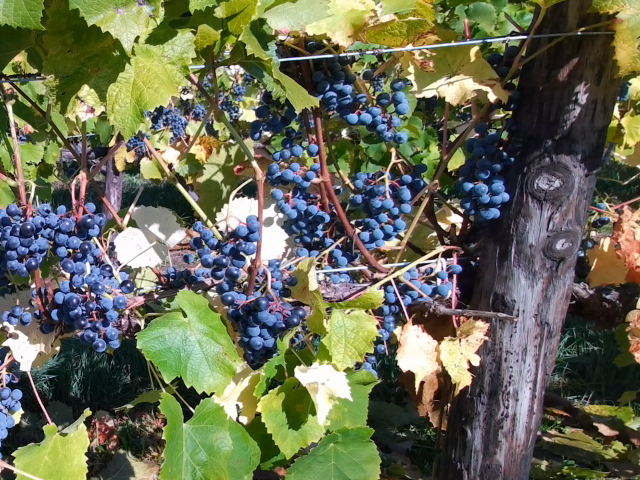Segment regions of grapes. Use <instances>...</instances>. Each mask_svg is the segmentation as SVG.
<instances>
[{"mask_svg":"<svg viewBox=\"0 0 640 480\" xmlns=\"http://www.w3.org/2000/svg\"><path fill=\"white\" fill-rule=\"evenodd\" d=\"M87 212L77 225L76 234L72 236L77 220L71 215L61 216L68 212L66 205H59L53 213L48 202L38 207V214L21 219L24 210L19 205L8 204L6 209H0V269L11 274L18 273L20 277H28L30 272L38 270L42 259L47 254L48 246L55 240L56 255L61 258L60 265L66 273H74L72 281H61L53 295L55 305L50 311L52 321L64 320L68 333L84 330L80 334V343L93 345L94 351L103 353L107 350V343L111 350L121 347L118 339L119 331L113 327L114 321L120 318V311L128 305V298L116 295L114 298L103 297L104 293L111 294L114 290L130 294L135 290V284L130 281L129 272H119L121 283L114 277V270L110 263L95 265L96 256L101 249L91 242L101 234V228L107 224L105 213L94 214L97 205L87 202ZM82 288L86 284L92 287L93 300L84 302L79 293H71L72 286ZM105 313V319L92 321L89 314L96 310Z\"/></svg>","mask_w":640,"mask_h":480,"instance_id":"1","label":"grapes"},{"mask_svg":"<svg viewBox=\"0 0 640 480\" xmlns=\"http://www.w3.org/2000/svg\"><path fill=\"white\" fill-rule=\"evenodd\" d=\"M245 225H236L235 230L229 231V237L235 243L221 242L214 238L203 221H195L193 230L200 233L192 237L189 245L192 250H198L201 265L194 271L196 282H203L204 277H212L215 281L222 280L216 286L221 295V304L229 306L227 319L237 321V332L240 333L239 346L246 350L243 359L249 366L265 364L267 360L279 355L276 335L285 329L296 327L305 318V309L294 307L289 302L280 301L279 306L285 307L286 316L280 311L270 313V303L274 297L266 293L254 292L248 296L241 291H233L235 281L240 278L241 270L246 264V258L240 254L254 255L257 251L254 242L261 239L259 233L260 222L256 215L245 218Z\"/></svg>","mask_w":640,"mask_h":480,"instance_id":"2","label":"grapes"},{"mask_svg":"<svg viewBox=\"0 0 640 480\" xmlns=\"http://www.w3.org/2000/svg\"><path fill=\"white\" fill-rule=\"evenodd\" d=\"M427 171V165L420 163L415 166V172L403 175L400 178V184L402 186L396 188L398 199L401 203L399 207L395 206V201L392 198L380 199L381 195H386V185H367L360 194H355L349 199V204L352 207H360L361 203L364 206L361 207V211L367 214L364 219H356L355 226H363L362 232L359 233L364 244L367 246L370 252H374L376 247H384L386 242H392L397 239V235L401 234L407 227V222L403 220L400 213L411 214V200L413 194L410 189L415 192H421L425 188V182L423 179H419V176ZM382 210H389V215L394 220V225L380 226L381 223H387L389 216L381 212Z\"/></svg>","mask_w":640,"mask_h":480,"instance_id":"3","label":"grapes"},{"mask_svg":"<svg viewBox=\"0 0 640 480\" xmlns=\"http://www.w3.org/2000/svg\"><path fill=\"white\" fill-rule=\"evenodd\" d=\"M321 169V164L312 163L310 170L305 172V177L301 175H294V172L301 171V164L299 162H291L289 169L280 171V165L278 163H269L268 171L266 173V179L270 180V185L278 187L281 185H287L290 183L297 184L293 189L292 201L285 202L283 199L284 191L281 188H273L271 190V196L277 201V208L281 210L283 214H287L290 219V223L285 227V233L288 236H292L295 233H303L302 236H295L294 241L296 243H310L314 238L323 240V246L325 249L333 246L335 240L330 237L324 238V227L331 220V215L328 212L321 211L316 205H309L307 202L315 197L314 193L307 192V189L311 187V181L317 177V172Z\"/></svg>","mask_w":640,"mask_h":480,"instance_id":"4","label":"grapes"},{"mask_svg":"<svg viewBox=\"0 0 640 480\" xmlns=\"http://www.w3.org/2000/svg\"><path fill=\"white\" fill-rule=\"evenodd\" d=\"M334 81L326 78L317 86V90L312 92L315 98L323 99L327 111L334 109L339 112L340 118L346 120L350 125L366 126L369 132H376L381 135L384 143L394 142L404 144L409 140V135L403 131L392 133L391 128L401 126L400 117H392L390 122L381 115V108L377 106H367L361 113H355L357 107L367 101V94H353V83L356 81L355 75H345L343 71L334 74Z\"/></svg>","mask_w":640,"mask_h":480,"instance_id":"5","label":"grapes"},{"mask_svg":"<svg viewBox=\"0 0 640 480\" xmlns=\"http://www.w3.org/2000/svg\"><path fill=\"white\" fill-rule=\"evenodd\" d=\"M495 159L499 162H494L490 170L481 168L475 171V177L480 180H487L492 173L494 176L491 178V184L483 182L475 184L470 179H461L456 184L459 192L464 194L472 192V195L477 198L476 200L464 198L460 202V208L465 210L468 216H475L479 221L498 218L501 204H507L510 201V195L505 191L506 180L499 174L503 171V165L500 162L511 165L515 162V158L507 151H498Z\"/></svg>","mask_w":640,"mask_h":480,"instance_id":"6","label":"grapes"},{"mask_svg":"<svg viewBox=\"0 0 640 480\" xmlns=\"http://www.w3.org/2000/svg\"><path fill=\"white\" fill-rule=\"evenodd\" d=\"M433 272L431 267H428L424 270L426 275H430ZM423 272H420L418 267H411L408 271L403 272V277L405 281L410 282L411 285L415 286L421 293L427 295L429 297H434L435 295L446 296L450 293V290L453 288V284L451 282L440 283L438 286L436 285H428L426 282L421 283L416 279L419 276H424ZM396 291L400 294V299L405 307L409 305H416L417 301H428L431 302L429 297L420 296V294L415 290L411 289L405 283H399L396 286Z\"/></svg>","mask_w":640,"mask_h":480,"instance_id":"7","label":"grapes"},{"mask_svg":"<svg viewBox=\"0 0 640 480\" xmlns=\"http://www.w3.org/2000/svg\"><path fill=\"white\" fill-rule=\"evenodd\" d=\"M23 397L24 392L21 389L12 390L10 387L0 389V448L2 440L8 437V429L15 425L14 417L8 415L9 410L20 411L22 409L20 401Z\"/></svg>","mask_w":640,"mask_h":480,"instance_id":"8","label":"grapes"},{"mask_svg":"<svg viewBox=\"0 0 640 480\" xmlns=\"http://www.w3.org/2000/svg\"><path fill=\"white\" fill-rule=\"evenodd\" d=\"M391 90L396 91L392 97L388 93H380L376 97V101L380 106H387L394 102L395 111L399 115H406L410 113L409 100L406 98V94L402 92L405 88V81L403 79H393L389 83Z\"/></svg>","mask_w":640,"mask_h":480,"instance_id":"9","label":"grapes"},{"mask_svg":"<svg viewBox=\"0 0 640 480\" xmlns=\"http://www.w3.org/2000/svg\"><path fill=\"white\" fill-rule=\"evenodd\" d=\"M268 268L272 269V278L276 279V281L272 282V294L275 295L276 298L290 297L292 295L290 288H295L298 285V278L289 275L285 278L287 287H283L284 271L281 270L283 268L282 262L279 259H270L268 261Z\"/></svg>","mask_w":640,"mask_h":480,"instance_id":"10","label":"grapes"},{"mask_svg":"<svg viewBox=\"0 0 640 480\" xmlns=\"http://www.w3.org/2000/svg\"><path fill=\"white\" fill-rule=\"evenodd\" d=\"M304 138V132L296 130L295 128H288L286 130V137L281 140V151L272 153V159L274 161H284L293 157H301L305 154V147L299 144H294V140H302Z\"/></svg>","mask_w":640,"mask_h":480,"instance_id":"11","label":"grapes"},{"mask_svg":"<svg viewBox=\"0 0 640 480\" xmlns=\"http://www.w3.org/2000/svg\"><path fill=\"white\" fill-rule=\"evenodd\" d=\"M41 312L35 310L33 314L28 311H23L21 305L14 304L10 311H2L0 313V319L3 322H7L10 326H17L19 322L20 327H29L33 321V317L36 320L41 319Z\"/></svg>","mask_w":640,"mask_h":480,"instance_id":"12","label":"grapes"},{"mask_svg":"<svg viewBox=\"0 0 640 480\" xmlns=\"http://www.w3.org/2000/svg\"><path fill=\"white\" fill-rule=\"evenodd\" d=\"M400 311V307L397 304L382 305L379 308L380 314L383 316V327L378 330L380 339L382 341H389L391 339V332L396 328L395 316Z\"/></svg>","mask_w":640,"mask_h":480,"instance_id":"13","label":"grapes"},{"mask_svg":"<svg viewBox=\"0 0 640 480\" xmlns=\"http://www.w3.org/2000/svg\"><path fill=\"white\" fill-rule=\"evenodd\" d=\"M342 246L343 244L340 242L336 247H333L331 249V256L334 258V263L336 264V266L332 267L330 265H325L324 269L343 268L347 267V265L353 260V258L355 262H358L360 260V256L357 254H354L353 256L350 252H345L343 254L344 249L342 248Z\"/></svg>","mask_w":640,"mask_h":480,"instance_id":"14","label":"grapes"},{"mask_svg":"<svg viewBox=\"0 0 640 480\" xmlns=\"http://www.w3.org/2000/svg\"><path fill=\"white\" fill-rule=\"evenodd\" d=\"M271 124L265 123L263 120H254L251 122V131L250 138L253 141H258L261 139V134L263 131H270Z\"/></svg>","mask_w":640,"mask_h":480,"instance_id":"15","label":"grapes"},{"mask_svg":"<svg viewBox=\"0 0 640 480\" xmlns=\"http://www.w3.org/2000/svg\"><path fill=\"white\" fill-rule=\"evenodd\" d=\"M367 179H369L371 182H374L375 176L372 173H363V172H358L355 175V179L352 181V184L357 192H360L363 189Z\"/></svg>","mask_w":640,"mask_h":480,"instance_id":"16","label":"grapes"},{"mask_svg":"<svg viewBox=\"0 0 640 480\" xmlns=\"http://www.w3.org/2000/svg\"><path fill=\"white\" fill-rule=\"evenodd\" d=\"M326 276L330 278L333 284L342 282L349 284L351 282V276L349 275V272L326 274Z\"/></svg>","mask_w":640,"mask_h":480,"instance_id":"17","label":"grapes"},{"mask_svg":"<svg viewBox=\"0 0 640 480\" xmlns=\"http://www.w3.org/2000/svg\"><path fill=\"white\" fill-rule=\"evenodd\" d=\"M377 363V358L375 356H368L366 361L362 363V369L364 371H370L375 377L379 376V373L372 367Z\"/></svg>","mask_w":640,"mask_h":480,"instance_id":"18","label":"grapes"},{"mask_svg":"<svg viewBox=\"0 0 640 480\" xmlns=\"http://www.w3.org/2000/svg\"><path fill=\"white\" fill-rule=\"evenodd\" d=\"M160 276L161 277H168L171 279H176L178 276V271L176 270L175 267H169L166 269V271H161L160 272Z\"/></svg>","mask_w":640,"mask_h":480,"instance_id":"19","label":"grapes"}]
</instances>
